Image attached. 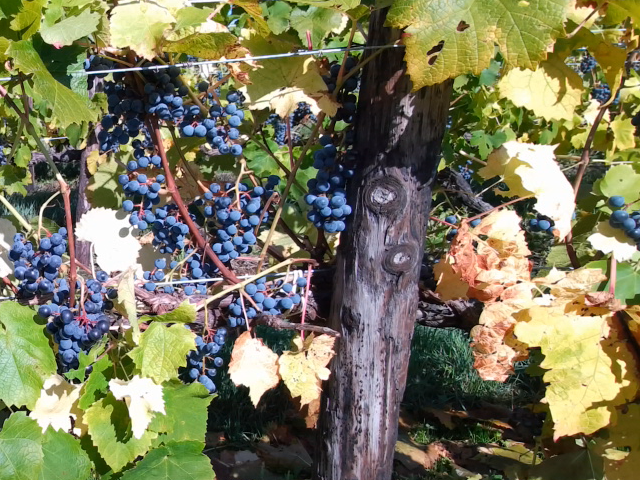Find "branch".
<instances>
[{
	"label": "branch",
	"instance_id": "30e6481e",
	"mask_svg": "<svg viewBox=\"0 0 640 480\" xmlns=\"http://www.w3.org/2000/svg\"><path fill=\"white\" fill-rule=\"evenodd\" d=\"M147 122L150 126L152 137L155 140L158 156L160 158L161 175H162L163 181L167 185V188L169 189V192L171 194L172 204L177 209H179L178 211L179 218L187 225L190 233L194 237V240L198 243V245L200 246V248L202 249L206 257L208 258V260L216 268H218L222 273L225 274L228 282L232 285V287H230L229 289L223 290L218 294L199 302L197 305L194 306L195 310H200L204 305L212 303L222 298L225 295H229L235 290L239 289L241 286L248 284L253 280L258 279L261 276L267 275L269 272H274L275 270H278L281 267H284L288 264L307 263V262L315 263L317 265L321 264V261L319 259L313 258V257L285 259L284 261L279 262L278 264H275L268 269L259 271L256 274L251 275L250 279L239 281V279L236 278V274L234 270L216 254V252L211 247L207 239L204 237L196 221L188 214L189 207L183 200H181L180 190L170 171L169 154L167 152L164 136L161 133V128H160L157 117L154 114H149L147 116Z\"/></svg>",
	"mask_w": 640,
	"mask_h": 480
},
{
	"label": "branch",
	"instance_id": "325d2c04",
	"mask_svg": "<svg viewBox=\"0 0 640 480\" xmlns=\"http://www.w3.org/2000/svg\"><path fill=\"white\" fill-rule=\"evenodd\" d=\"M0 94L3 97H5L13 105V108L16 111V113L27 123L28 130H29L33 140L36 142L37 145L40 146V148L46 154V156H47L48 160L50 161L51 166H52V168H53V170L55 172V175L57 176V178L59 179V182L61 183L62 190H63V193H64V204H65V207H66V224L68 226V236H69V258H70V271H69L70 298H69V306L71 308H74L75 307V304H74V300H75V278L72 277V274L76 273V266H75L73 224L71 222V204H70V201H69V191H68L67 183L64 180L63 175L60 173L58 165H57L55 159L53 158L52 153L50 152L49 148L43 143L42 139L37 136L36 131L33 128L32 120L20 109L16 99L11 97L4 90L2 85H0Z\"/></svg>",
	"mask_w": 640,
	"mask_h": 480
},
{
	"label": "branch",
	"instance_id": "170604dd",
	"mask_svg": "<svg viewBox=\"0 0 640 480\" xmlns=\"http://www.w3.org/2000/svg\"><path fill=\"white\" fill-rule=\"evenodd\" d=\"M278 222H279V226L288 235V237L291 238V240L294 242V244L298 245L299 247H301L302 251H305L306 250V245L303 242H301L300 240H298V238L292 233V231L285 225L284 220L282 218H279Z\"/></svg>",
	"mask_w": 640,
	"mask_h": 480
},
{
	"label": "branch",
	"instance_id": "45aa463d",
	"mask_svg": "<svg viewBox=\"0 0 640 480\" xmlns=\"http://www.w3.org/2000/svg\"><path fill=\"white\" fill-rule=\"evenodd\" d=\"M241 163L243 165V168L247 174V177L250 179V181L253 183L254 187L258 186V180L255 178V176L252 174L251 169L246 161V157L242 156L241 157Z\"/></svg>",
	"mask_w": 640,
	"mask_h": 480
}]
</instances>
